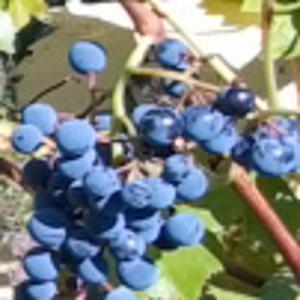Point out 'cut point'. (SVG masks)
Wrapping results in <instances>:
<instances>
[{
    "mask_svg": "<svg viewBox=\"0 0 300 300\" xmlns=\"http://www.w3.org/2000/svg\"><path fill=\"white\" fill-rule=\"evenodd\" d=\"M139 44L135 47L134 51L122 67L118 77L117 84L113 93L112 112L115 117H125L124 111V98L129 86L131 76L136 67L141 62L145 53L152 46V38L148 34H142L139 37Z\"/></svg>",
    "mask_w": 300,
    "mask_h": 300,
    "instance_id": "6a23745f",
    "label": "cut point"
}]
</instances>
